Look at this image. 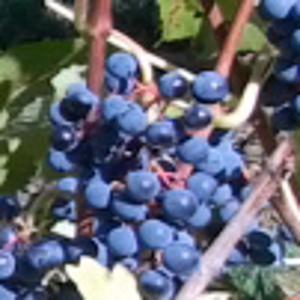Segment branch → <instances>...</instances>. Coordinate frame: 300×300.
<instances>
[{"label": "branch", "instance_id": "1", "mask_svg": "<svg viewBox=\"0 0 300 300\" xmlns=\"http://www.w3.org/2000/svg\"><path fill=\"white\" fill-rule=\"evenodd\" d=\"M261 100L251 109L249 118L264 151L274 154L272 161L238 203L216 240L201 254L187 276V283L178 291L176 300H192L206 291V286L230 250L247 234L261 216L269 199L290 179L300 163V132H288L279 145V138Z\"/></svg>", "mask_w": 300, "mask_h": 300}, {"label": "branch", "instance_id": "2", "mask_svg": "<svg viewBox=\"0 0 300 300\" xmlns=\"http://www.w3.org/2000/svg\"><path fill=\"white\" fill-rule=\"evenodd\" d=\"M258 0H240L228 25L217 0H201L210 30V38L217 55L216 73L225 75L229 91L235 98L243 94L245 80L237 59L240 39L250 20Z\"/></svg>", "mask_w": 300, "mask_h": 300}, {"label": "branch", "instance_id": "3", "mask_svg": "<svg viewBox=\"0 0 300 300\" xmlns=\"http://www.w3.org/2000/svg\"><path fill=\"white\" fill-rule=\"evenodd\" d=\"M88 22L87 43L88 62L85 82L90 95L99 97L105 91V38L114 32L112 19L113 6L109 0H89L87 4Z\"/></svg>", "mask_w": 300, "mask_h": 300}]
</instances>
